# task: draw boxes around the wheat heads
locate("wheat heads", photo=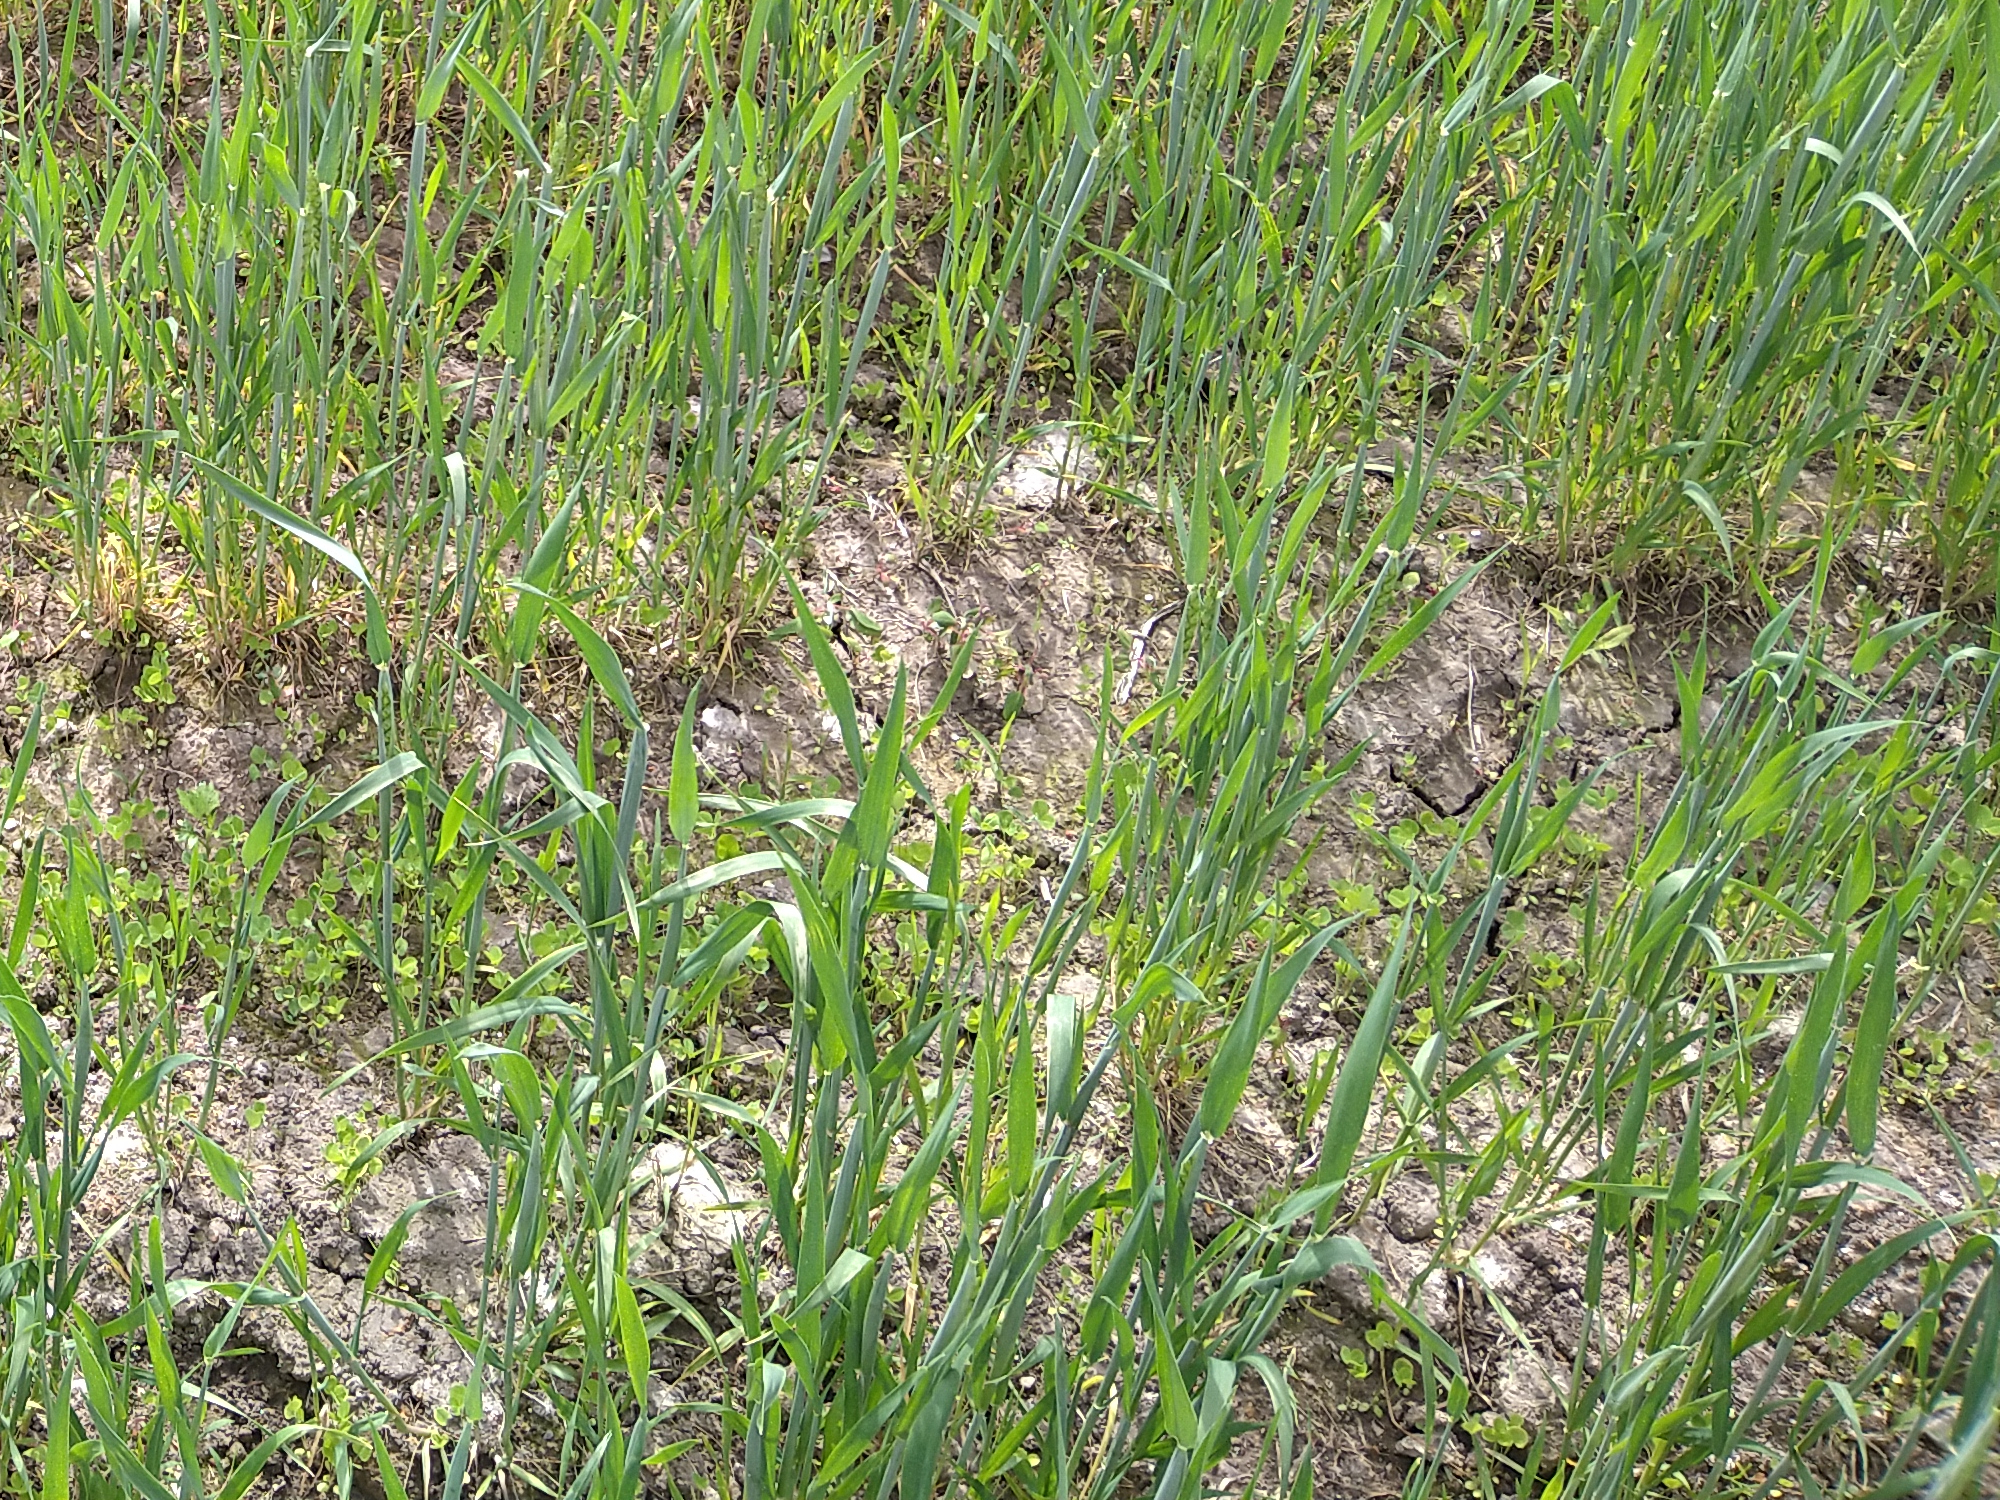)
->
[1786,99,1811,171]
[1891,0,1942,53]
[552,118,566,168]
[302,219,315,274]
[305,162,329,245]
[1697,96,1721,171]
[1177,1152,1194,1195]
[632,345,644,394]
[293,21,308,78]
[343,133,358,188]
[1192,53,1216,128]
[749,173,768,255]
[616,337,626,386]
[538,306,547,361]
[1909,14,1946,71]
[198,204,219,266]
[1182,586,1202,648]
[1769,119,1787,153]
[1202,582,1218,647]
[1088,115,1124,193]
[635,83,654,136]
